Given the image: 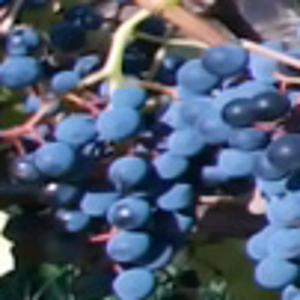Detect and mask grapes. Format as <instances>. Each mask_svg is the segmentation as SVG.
Here are the masks:
<instances>
[{"instance_id": "1", "label": "grapes", "mask_w": 300, "mask_h": 300, "mask_svg": "<svg viewBox=\"0 0 300 300\" xmlns=\"http://www.w3.org/2000/svg\"><path fill=\"white\" fill-rule=\"evenodd\" d=\"M156 71L158 84L176 88L177 97L154 104L146 120L149 91L129 82L93 117L36 123L44 142L9 162L11 185H40L38 199L61 235L105 219L120 233L103 245L116 268L110 294L144 300L157 289L152 272L175 258L173 244L148 229L157 214L185 235L196 223L195 186L212 193L255 179L267 214L244 245L254 283L281 300H300V132L276 138L260 125L288 118L300 87L281 89L277 75L298 78L300 69L239 46H208L199 59L165 55ZM214 152H213V153H212V155H211V162H205V163H203V164H202V165H199V166H197V167H196V169H195V171H194V184H193V183H191V182H189V181H183V180H184V179H185V178H186V177H187V175H188V173H189V170H190V164H193V163H196V162H198V161H200V160H202V159H203V158H205V156H206V154H207V149H216V151H214Z\"/></svg>"}, {"instance_id": "4", "label": "grapes", "mask_w": 300, "mask_h": 300, "mask_svg": "<svg viewBox=\"0 0 300 300\" xmlns=\"http://www.w3.org/2000/svg\"><path fill=\"white\" fill-rule=\"evenodd\" d=\"M101 58L97 53H84L77 56L72 62L70 70H58L49 76V86L56 92H70L79 80L94 70L100 69Z\"/></svg>"}, {"instance_id": "3", "label": "grapes", "mask_w": 300, "mask_h": 300, "mask_svg": "<svg viewBox=\"0 0 300 300\" xmlns=\"http://www.w3.org/2000/svg\"><path fill=\"white\" fill-rule=\"evenodd\" d=\"M64 20L53 25L47 34V43L56 52H70L81 48L88 37V31L100 28L102 15L92 5L78 4L66 9Z\"/></svg>"}, {"instance_id": "2", "label": "grapes", "mask_w": 300, "mask_h": 300, "mask_svg": "<svg viewBox=\"0 0 300 300\" xmlns=\"http://www.w3.org/2000/svg\"><path fill=\"white\" fill-rule=\"evenodd\" d=\"M41 34L32 25L9 32L3 41L6 58L0 63V86L6 91H28L36 88L46 73L42 61L28 52L39 47Z\"/></svg>"}, {"instance_id": "5", "label": "grapes", "mask_w": 300, "mask_h": 300, "mask_svg": "<svg viewBox=\"0 0 300 300\" xmlns=\"http://www.w3.org/2000/svg\"><path fill=\"white\" fill-rule=\"evenodd\" d=\"M258 44L296 59H300V47L288 48L285 42L281 39H264L260 40Z\"/></svg>"}]
</instances>
